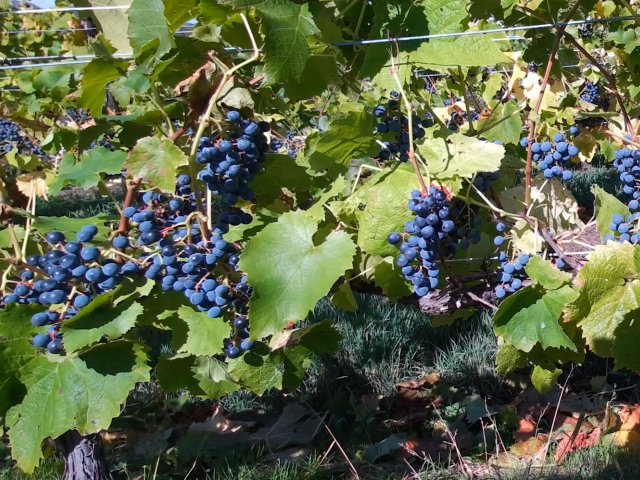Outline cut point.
Here are the masks:
<instances>
[{"label":"cut point","instance_id":"obj_2","mask_svg":"<svg viewBox=\"0 0 640 480\" xmlns=\"http://www.w3.org/2000/svg\"><path fill=\"white\" fill-rule=\"evenodd\" d=\"M195 216H197V211H192V212H190V213L187 215V217H186L185 225H186V226H189V225H190V223H191L192 218H193V217H195Z\"/></svg>","mask_w":640,"mask_h":480},{"label":"cut point","instance_id":"obj_1","mask_svg":"<svg viewBox=\"0 0 640 480\" xmlns=\"http://www.w3.org/2000/svg\"><path fill=\"white\" fill-rule=\"evenodd\" d=\"M414 154L417 156V159L419 160L421 166L425 169L428 181H431V176H430V173H429V169H428L427 165L423 162L422 157L417 153H414Z\"/></svg>","mask_w":640,"mask_h":480}]
</instances>
